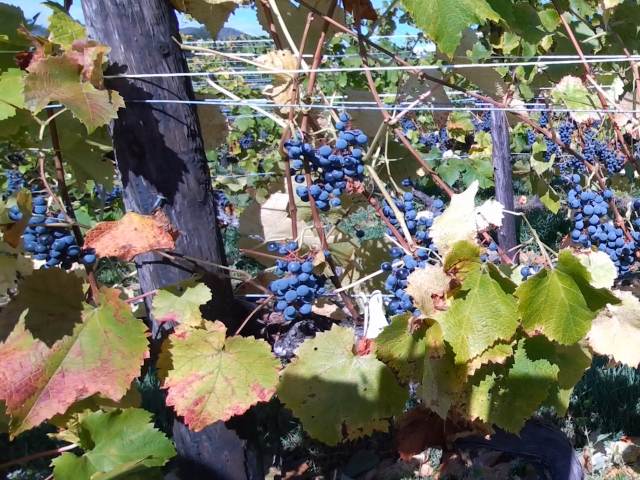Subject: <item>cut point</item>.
<instances>
[{
  "instance_id": "obj_1",
  "label": "cut point",
  "mask_w": 640,
  "mask_h": 480,
  "mask_svg": "<svg viewBox=\"0 0 640 480\" xmlns=\"http://www.w3.org/2000/svg\"><path fill=\"white\" fill-rule=\"evenodd\" d=\"M311 228H315V225H314V224H313V225H304V226L301 228V231H300V233H299L298 243H302V241H303V239H304V236H305L306 231L311 230Z\"/></svg>"
}]
</instances>
